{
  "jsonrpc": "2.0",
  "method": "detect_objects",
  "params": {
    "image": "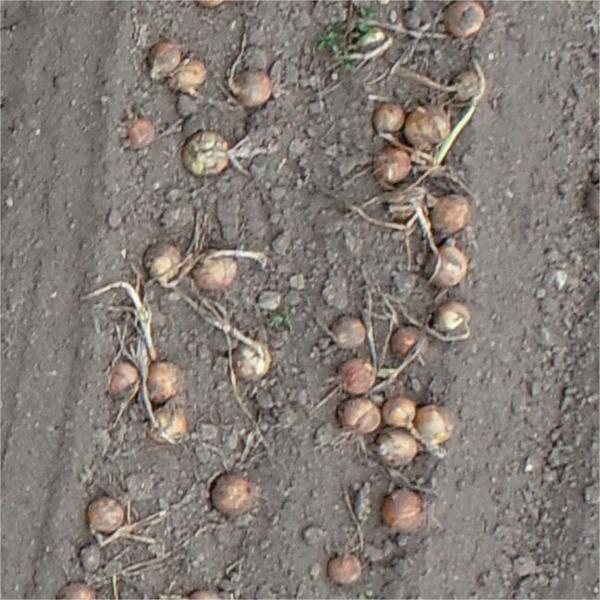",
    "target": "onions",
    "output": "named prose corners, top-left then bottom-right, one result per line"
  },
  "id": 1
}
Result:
top-left (406, 106), bottom-right (447, 147)
top-left (147, 404), bottom-right (188, 443)
top-left (337, 358), bottom-right (374, 394)
top-left (123, 115), bottom-right (156, 148)
top-left (229, 341), bottom-right (271, 379)
top-left (86, 496), bottom-right (123, 533)
top-left (172, 57), bottom-right (207, 91)
top-left (413, 406), bottom-right (450, 445)
top-left (148, 39), bottom-right (181, 77)
top-left (392, 184), bottom-right (423, 217)
top-left (185, 586), bottom-right (225, 600)
top-left (430, 194), bottom-right (472, 235)
top-left (209, 469), bottom-right (255, 516)
top-left (374, 428), bottom-right (418, 465)
top-left (371, 101), bottom-right (402, 135)
top-left (329, 314), bottom-right (363, 348)
top-left (326, 550), bottom-right (361, 584)
top-left (442, 0), bottom-right (483, 38)
top-left (144, 243), bottom-right (180, 282)
top-left (452, 68), bottom-right (479, 100)
top-left (383, 396), bottom-right (414, 427)
top-left (145, 361), bottom-right (184, 403)
top-left (433, 301), bottom-right (467, 335)
top-left (107, 360), bottom-right (139, 396)
top-left (387, 324), bottom-right (421, 361)
top-left (197, 0), bottom-right (228, 7)
top-left (56, 581), bottom-right (94, 599)
top-left (381, 489), bottom-right (423, 531)
top-left (230, 66), bottom-right (270, 106)
top-left (81, 542), bottom-right (100, 569)
top-left (376, 149), bottom-right (408, 182)
top-left (428, 246), bottom-right (467, 287)
top-left (180, 131), bottom-right (226, 177)
top-left (197, 255), bottom-right (236, 293)
top-left (338, 397), bottom-right (378, 432)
